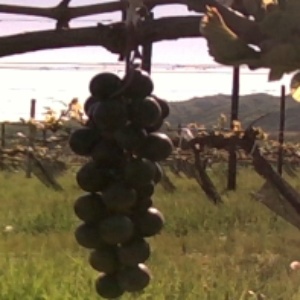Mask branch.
Segmentation results:
<instances>
[{"label": "branch", "mask_w": 300, "mask_h": 300, "mask_svg": "<svg viewBox=\"0 0 300 300\" xmlns=\"http://www.w3.org/2000/svg\"><path fill=\"white\" fill-rule=\"evenodd\" d=\"M182 3L189 11L207 13V7H216L227 26L239 37L254 43L256 41L250 20L230 12L220 0H119L90 6L69 8L71 0H61L54 8L31 7L15 4H0V13L38 16L57 20L56 29L37 30L0 37V57L37 50L72 46H102L113 54H123L127 31L134 27L131 51L163 39L198 37L203 15L168 16L143 20V12L157 4ZM122 11L121 21L97 28L69 29L73 18L108 12Z\"/></svg>", "instance_id": "30e6481e"}]
</instances>
